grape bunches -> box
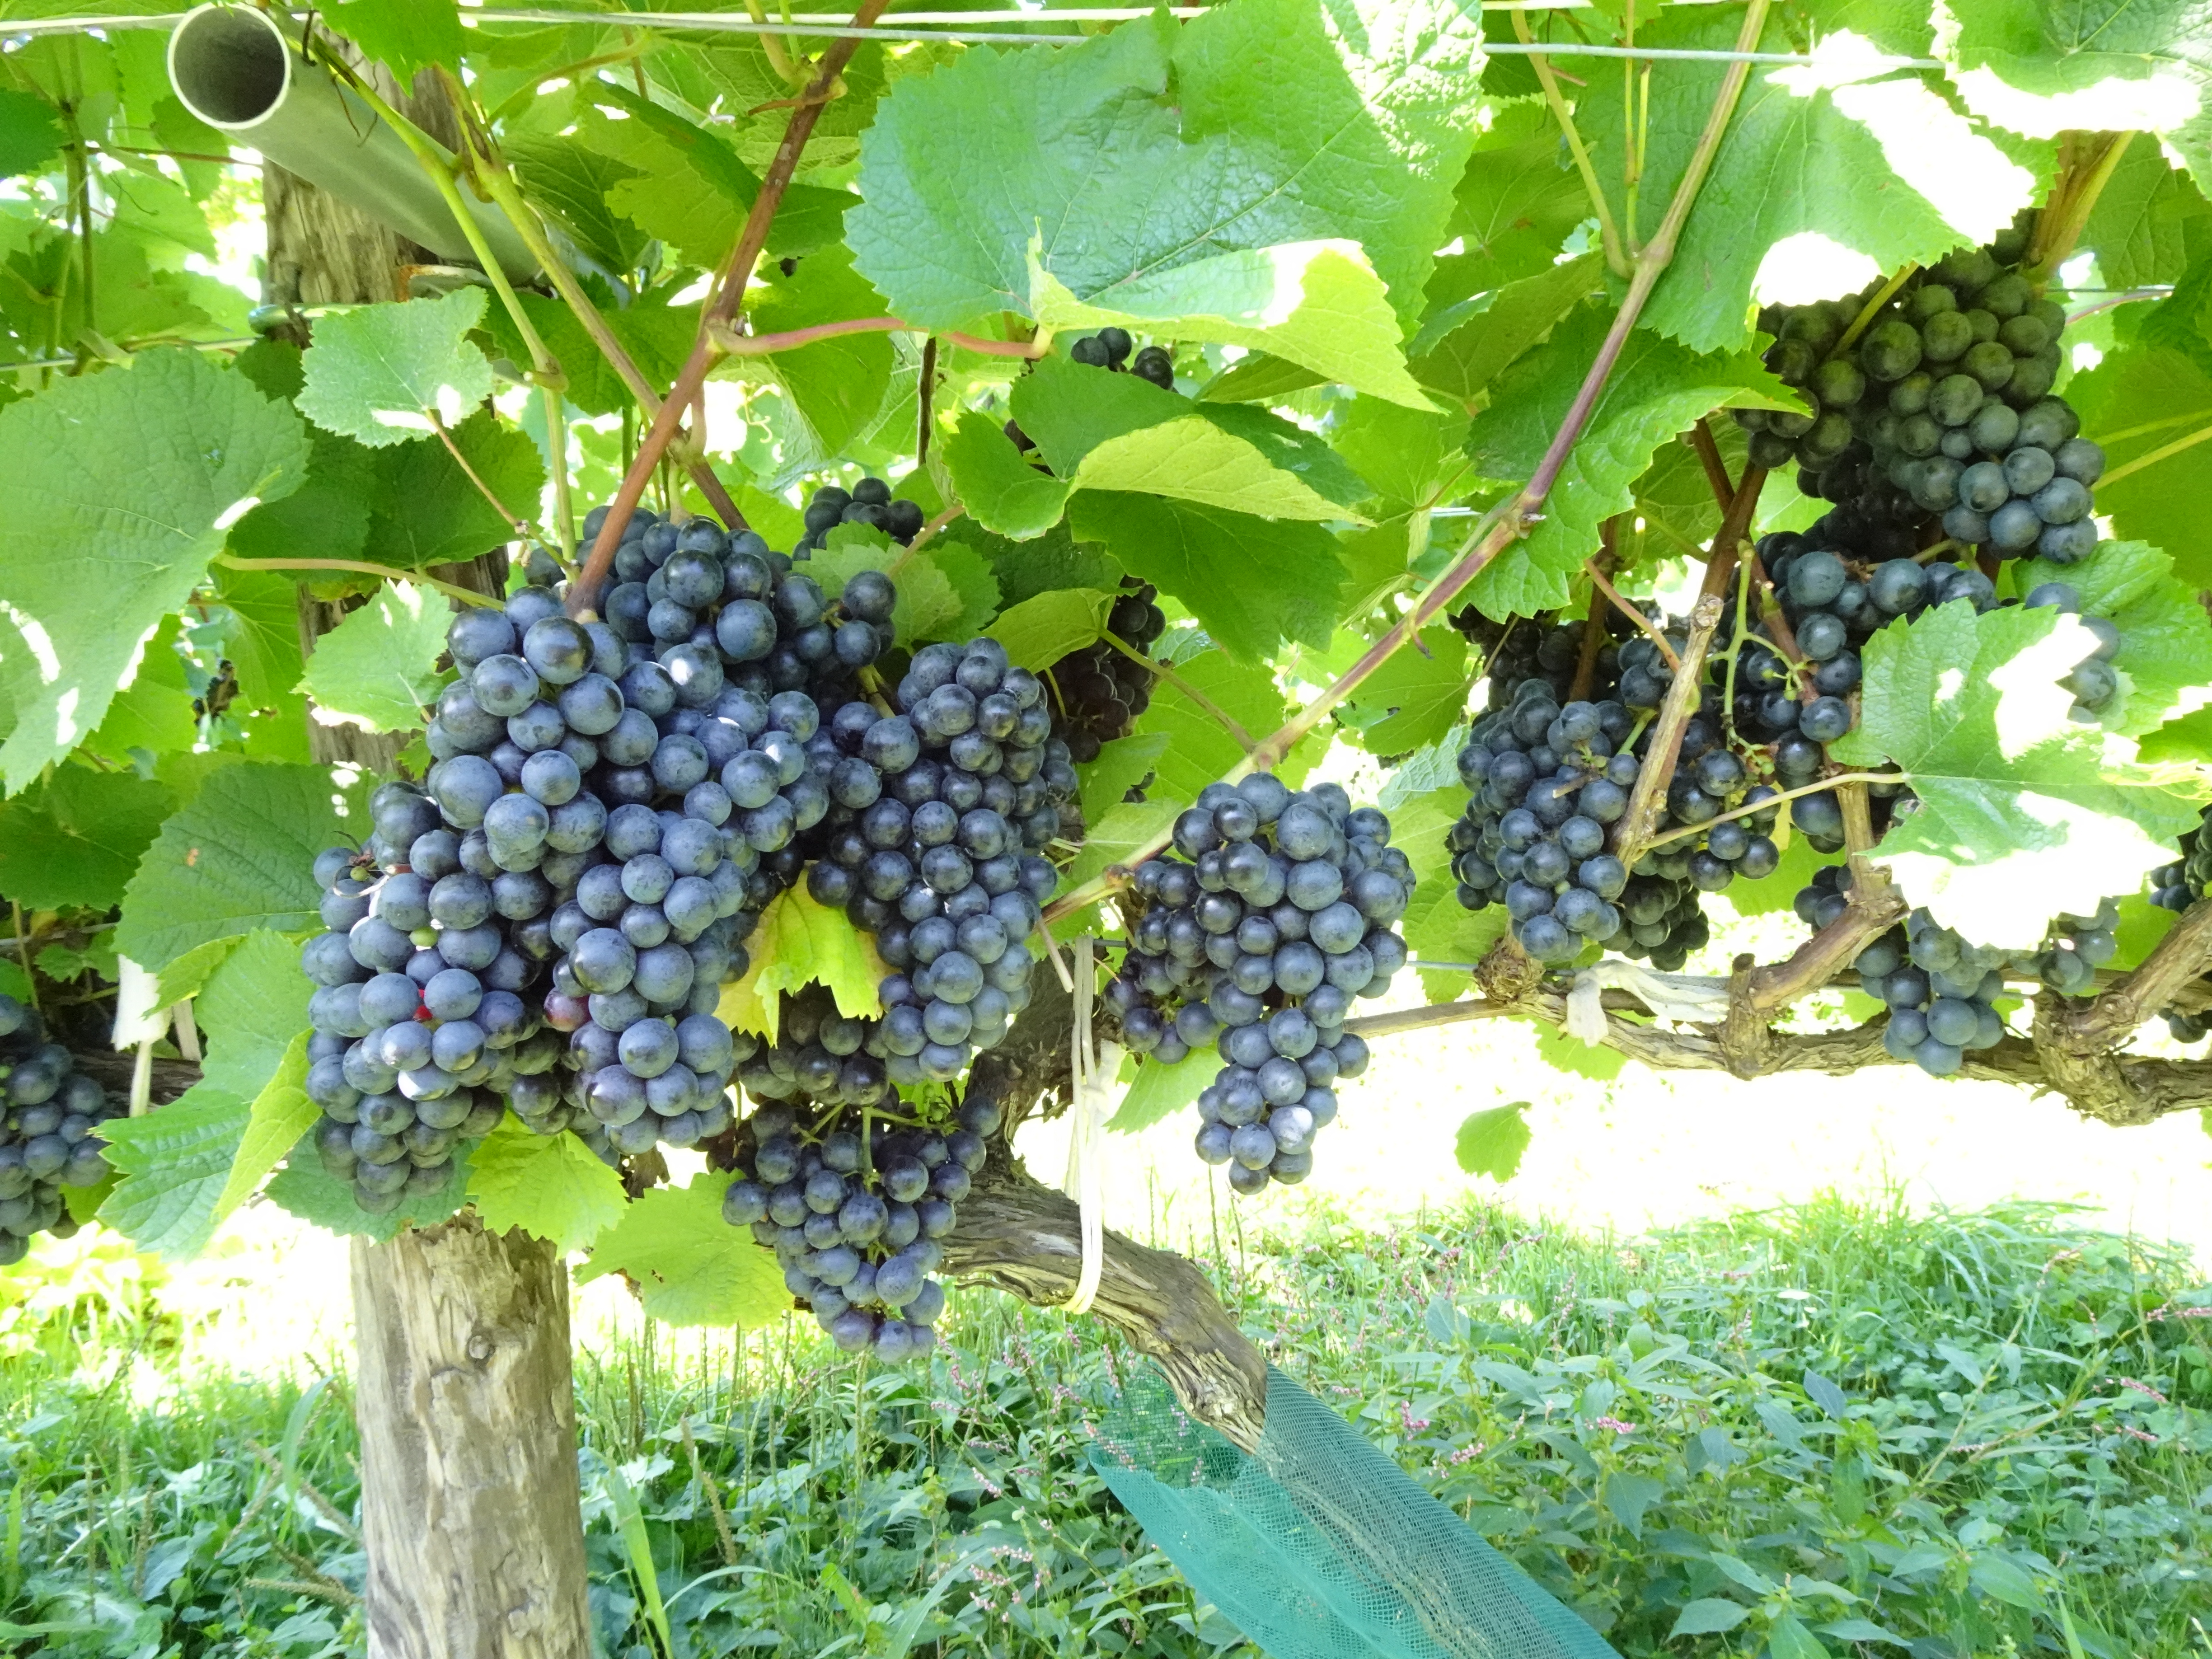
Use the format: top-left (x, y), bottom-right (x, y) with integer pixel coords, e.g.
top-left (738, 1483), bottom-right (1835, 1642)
top-left (2147, 864), bottom-right (2212, 1043)
top-left (791, 476), bottom-right (925, 561)
top-left (1104, 858), bottom-right (1217, 1062)
top-left (0, 967), bottom-right (115, 1263)
top-left (1001, 327), bottom-right (1179, 764)
top-left (2039, 894), bottom-right (2124, 998)
top-left (1171, 772), bottom-right (1416, 1196)
top-left (723, 1082), bottom-right (1001, 1367)
top-left (1620, 615), bottom-right (1859, 889)
top-left (1444, 800), bottom-right (1508, 910)
top-left (423, 582), bottom-right (673, 852)
top-left (1447, 600), bottom-right (1709, 969)
top-left (2019, 583), bottom-right (2121, 724)
top-left (2184, 814), bottom-right (2212, 903)
top-left (1792, 864), bottom-right (2003, 1078)
top-left (742, 978), bottom-right (891, 1107)
top-left (807, 639), bottom-right (1083, 1085)
top-left (1733, 212), bottom-right (2104, 566)
top-left (516, 689), bottom-right (842, 1154)
top-left (1458, 680), bottom-right (1639, 963)
top-left (1717, 467), bottom-right (1945, 650)
top-left (1772, 551), bottom-right (1998, 855)
top-left (525, 506), bottom-right (898, 727)
top-left (306, 784), bottom-right (551, 1216)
